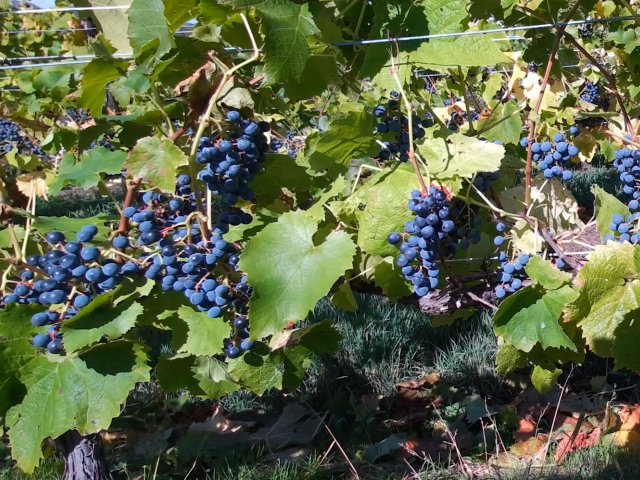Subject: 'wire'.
<instances>
[{
    "label": "wire",
    "instance_id": "wire-3",
    "mask_svg": "<svg viewBox=\"0 0 640 480\" xmlns=\"http://www.w3.org/2000/svg\"><path fill=\"white\" fill-rule=\"evenodd\" d=\"M96 9H110V10H127V5H112V4H94L85 6H66L56 7L49 9H15V10H1L0 16L3 15H18V14H51L58 12L68 11H87Z\"/></svg>",
    "mask_w": 640,
    "mask_h": 480
},
{
    "label": "wire",
    "instance_id": "wire-2",
    "mask_svg": "<svg viewBox=\"0 0 640 480\" xmlns=\"http://www.w3.org/2000/svg\"><path fill=\"white\" fill-rule=\"evenodd\" d=\"M98 53L77 54V55H46V56H0V62L3 61H48V60H70L58 63H18V64H0V69H20V68H60L65 66H73L75 64L90 65L89 59L98 58Z\"/></svg>",
    "mask_w": 640,
    "mask_h": 480
},
{
    "label": "wire",
    "instance_id": "wire-1",
    "mask_svg": "<svg viewBox=\"0 0 640 480\" xmlns=\"http://www.w3.org/2000/svg\"><path fill=\"white\" fill-rule=\"evenodd\" d=\"M631 20H640V15L601 17L594 20H568L562 23L526 25L525 27H502V28H496V29L463 31V32L449 33V34L435 33L431 35H410L405 37L382 38V39H374V40L332 42L331 46L347 47V46L407 42L412 40H433L437 38L451 39V38H460V37H466V36H478V35L498 34V33H504V32H515L516 30H541V29H549V28H564L570 25H596L603 22L631 21Z\"/></svg>",
    "mask_w": 640,
    "mask_h": 480
},
{
    "label": "wire",
    "instance_id": "wire-4",
    "mask_svg": "<svg viewBox=\"0 0 640 480\" xmlns=\"http://www.w3.org/2000/svg\"><path fill=\"white\" fill-rule=\"evenodd\" d=\"M498 259L497 255L494 256H462V257H454L450 259H443V264H452L456 262H464V261H496Z\"/></svg>",
    "mask_w": 640,
    "mask_h": 480
}]
</instances>
